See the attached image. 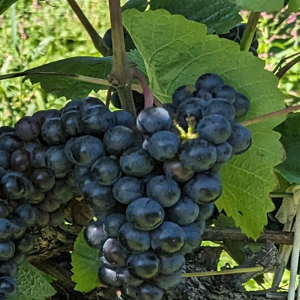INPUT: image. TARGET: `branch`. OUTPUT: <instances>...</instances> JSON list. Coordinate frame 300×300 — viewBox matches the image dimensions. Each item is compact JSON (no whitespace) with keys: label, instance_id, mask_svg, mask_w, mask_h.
Masks as SVG:
<instances>
[{"label":"branch","instance_id":"obj_1","mask_svg":"<svg viewBox=\"0 0 300 300\" xmlns=\"http://www.w3.org/2000/svg\"><path fill=\"white\" fill-rule=\"evenodd\" d=\"M109 8L111 13L110 40L113 42V64L111 72L107 75V81L117 89L123 110L137 117L131 87L133 82V77L130 75L131 62L125 55L121 3L118 0H111Z\"/></svg>","mask_w":300,"mask_h":300}]
</instances>
